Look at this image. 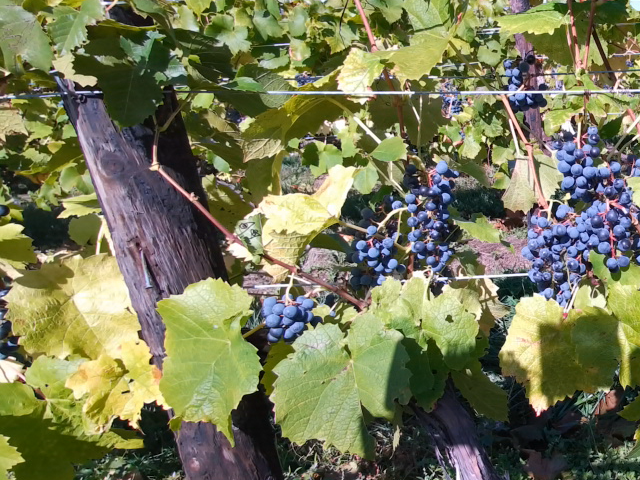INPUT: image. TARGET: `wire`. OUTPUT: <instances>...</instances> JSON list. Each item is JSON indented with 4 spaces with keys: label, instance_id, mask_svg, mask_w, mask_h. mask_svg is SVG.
<instances>
[{
    "label": "wire",
    "instance_id": "wire-3",
    "mask_svg": "<svg viewBox=\"0 0 640 480\" xmlns=\"http://www.w3.org/2000/svg\"><path fill=\"white\" fill-rule=\"evenodd\" d=\"M66 95H67L66 91L52 92V93L0 95V100L54 98V97H63V96H66Z\"/></svg>",
    "mask_w": 640,
    "mask_h": 480
},
{
    "label": "wire",
    "instance_id": "wire-2",
    "mask_svg": "<svg viewBox=\"0 0 640 480\" xmlns=\"http://www.w3.org/2000/svg\"><path fill=\"white\" fill-rule=\"evenodd\" d=\"M527 272H512V273H492L488 275H479V274H465L459 276H439L436 278L437 282L441 281H462L467 279H477V280H490L495 278H514V277H527Z\"/></svg>",
    "mask_w": 640,
    "mask_h": 480
},
{
    "label": "wire",
    "instance_id": "wire-4",
    "mask_svg": "<svg viewBox=\"0 0 640 480\" xmlns=\"http://www.w3.org/2000/svg\"><path fill=\"white\" fill-rule=\"evenodd\" d=\"M288 288L287 282L273 283V284H255V285H243V290H257V289H276V288Z\"/></svg>",
    "mask_w": 640,
    "mask_h": 480
},
{
    "label": "wire",
    "instance_id": "wire-5",
    "mask_svg": "<svg viewBox=\"0 0 640 480\" xmlns=\"http://www.w3.org/2000/svg\"><path fill=\"white\" fill-rule=\"evenodd\" d=\"M164 93L165 94H172V95H184V94H203V95H208L209 91L205 90V89H182V90H174V89H168L165 88L164 89Z\"/></svg>",
    "mask_w": 640,
    "mask_h": 480
},
{
    "label": "wire",
    "instance_id": "wire-1",
    "mask_svg": "<svg viewBox=\"0 0 640 480\" xmlns=\"http://www.w3.org/2000/svg\"><path fill=\"white\" fill-rule=\"evenodd\" d=\"M600 93H640V88H597V89H490V90H448V91H430V90H354V91H338V90H268L260 91L261 96L270 95H302V96H320V95H336V96H356V95H428V96H450V95H492V94H600Z\"/></svg>",
    "mask_w": 640,
    "mask_h": 480
}]
</instances>
